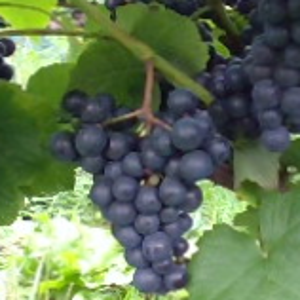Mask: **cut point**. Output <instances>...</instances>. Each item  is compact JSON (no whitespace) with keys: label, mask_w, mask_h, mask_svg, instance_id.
<instances>
[{"label":"cut point","mask_w":300,"mask_h":300,"mask_svg":"<svg viewBox=\"0 0 300 300\" xmlns=\"http://www.w3.org/2000/svg\"><path fill=\"white\" fill-rule=\"evenodd\" d=\"M153 79H154V64L151 61L146 62V77L144 90L143 107H139L138 111L142 116H151L154 113L153 109Z\"/></svg>","instance_id":"6a23745f"}]
</instances>
